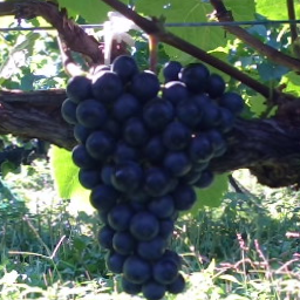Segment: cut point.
<instances>
[{
	"instance_id": "cut-point-1",
	"label": "cut point",
	"mask_w": 300,
	"mask_h": 300,
	"mask_svg": "<svg viewBox=\"0 0 300 300\" xmlns=\"http://www.w3.org/2000/svg\"><path fill=\"white\" fill-rule=\"evenodd\" d=\"M148 35L149 44H150V69L157 73V52L158 45L155 39V36Z\"/></svg>"
}]
</instances>
